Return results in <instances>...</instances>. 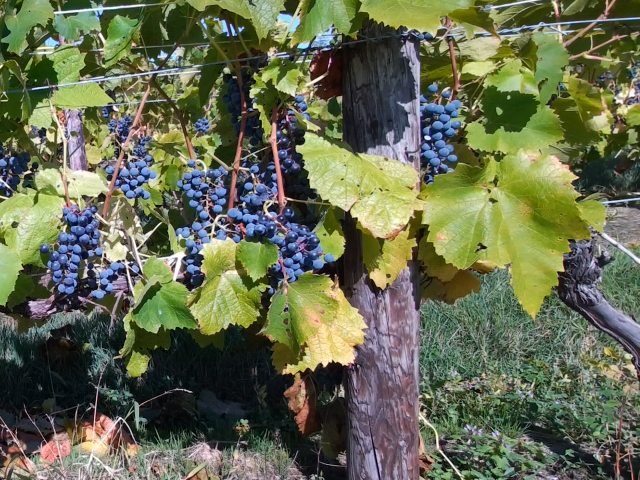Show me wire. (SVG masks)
<instances>
[{"instance_id":"obj_1","label":"wire","mask_w":640,"mask_h":480,"mask_svg":"<svg viewBox=\"0 0 640 480\" xmlns=\"http://www.w3.org/2000/svg\"><path fill=\"white\" fill-rule=\"evenodd\" d=\"M404 36H405V33L400 32L392 35H381V36H375V37L360 39V40L338 41L331 44L320 45L315 47H303V48H296V49H289V50H278V51L269 52V53H258V54L245 55V56L228 58V59L206 61V62H201L197 64H182L177 66H168L164 68H154L141 73L114 75L110 77H104L101 79L85 80L82 82H75L70 84H48V85H39L34 87H26L25 91L37 92L41 90H50V89H72L77 87H84L87 85L103 84L106 82H112L116 80L143 78V77L151 76L157 73H166L170 71H179L184 69H199V68L208 67V66L237 63V62L261 59V58H271V57H276L280 55H291V54H298V53H305V52H317L322 50L333 49L340 46L362 45V44H368V43H373V42L383 41V40H394V39L402 38Z\"/></svg>"},{"instance_id":"obj_2","label":"wire","mask_w":640,"mask_h":480,"mask_svg":"<svg viewBox=\"0 0 640 480\" xmlns=\"http://www.w3.org/2000/svg\"><path fill=\"white\" fill-rule=\"evenodd\" d=\"M630 19L639 20L640 15L628 14L624 16H601V17L575 19V20H540L525 26H521V27H515L511 29H498L497 34L498 35L513 34L517 32L527 31L542 25H577V24L596 23V22H603V21H626Z\"/></svg>"},{"instance_id":"obj_3","label":"wire","mask_w":640,"mask_h":480,"mask_svg":"<svg viewBox=\"0 0 640 480\" xmlns=\"http://www.w3.org/2000/svg\"><path fill=\"white\" fill-rule=\"evenodd\" d=\"M184 4L183 0L172 2H152L142 4H130V5H118V6H98V7H83L79 9H72L66 11H54V16H68L74 14H81L85 12H100V11H120V10H132V9H144L154 7H174Z\"/></svg>"},{"instance_id":"obj_4","label":"wire","mask_w":640,"mask_h":480,"mask_svg":"<svg viewBox=\"0 0 640 480\" xmlns=\"http://www.w3.org/2000/svg\"><path fill=\"white\" fill-rule=\"evenodd\" d=\"M533 0H507L504 2H500L491 6H486V7H482L481 11L482 12H488V11H493L502 7H506L509 5H514V4H528V3H532Z\"/></svg>"},{"instance_id":"obj_5","label":"wire","mask_w":640,"mask_h":480,"mask_svg":"<svg viewBox=\"0 0 640 480\" xmlns=\"http://www.w3.org/2000/svg\"><path fill=\"white\" fill-rule=\"evenodd\" d=\"M633 201H640V196L609 198V199L603 200L601 202V205L605 206V205L611 204V203H623V202H633Z\"/></svg>"},{"instance_id":"obj_6","label":"wire","mask_w":640,"mask_h":480,"mask_svg":"<svg viewBox=\"0 0 640 480\" xmlns=\"http://www.w3.org/2000/svg\"><path fill=\"white\" fill-rule=\"evenodd\" d=\"M469 31H457L455 33H445V34H435L436 39H447V38H457L459 36H469Z\"/></svg>"}]
</instances>
